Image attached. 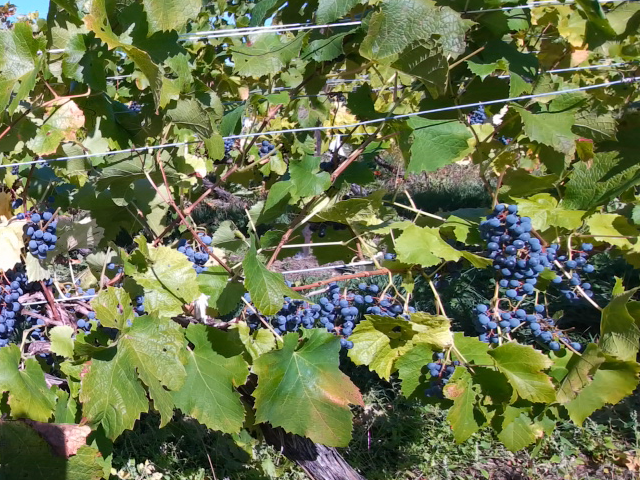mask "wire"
Masks as SVG:
<instances>
[{"mask_svg": "<svg viewBox=\"0 0 640 480\" xmlns=\"http://www.w3.org/2000/svg\"><path fill=\"white\" fill-rule=\"evenodd\" d=\"M638 83H640V77H624L623 79H619V80H614V81H610V82H601V83H598V84H592V85H588V86H581V87H576V88L567 89V90H563V91L541 92V93H536V94H532V95H525V96H520V97H515V98H504V99L485 100V101L472 102V103L455 104V105L443 106V107L435 108V109H423V110H420V111H411V112H407V113H403V114L382 116V117H376V118H371V119H368V120L355 121V122H337V123H330V124H316V125H313V126L296 127V128H291V129L236 132V133H231V134H225V135L222 136V139L223 140H228V139H233V138H238V137L294 134V133H298V132H313V131L318 130V129H332V128H339V127H357V126L370 125V124L378 123V122L405 119V118H410V117H413V116H422V115H425V114H437V113H443V112H446V111H452V110L464 109V108H475V107L480 108L482 106H487V105L517 103V102H522V101H527V100H534V99L543 98V97L565 96V95H570V94H574V93H578V92H584V91L600 89V88H603V87H612V86L622 85V84H638Z\"/></svg>", "mask_w": 640, "mask_h": 480, "instance_id": "obj_1", "label": "wire"}, {"mask_svg": "<svg viewBox=\"0 0 640 480\" xmlns=\"http://www.w3.org/2000/svg\"><path fill=\"white\" fill-rule=\"evenodd\" d=\"M202 144H203L202 140L181 141V142L165 143V144L154 145V146L133 147V148L123 149L119 151H111V152H91V153H84V154L64 155V156H58V157H52V158L21 160V161H15L10 163H2L0 164V169L12 168V167L23 166V165L54 163V162L74 160V159H86V158H94V157H113V156H121V155L135 153V152L156 151V150H162V149L174 148V147H183V146H200Z\"/></svg>", "mask_w": 640, "mask_h": 480, "instance_id": "obj_3", "label": "wire"}, {"mask_svg": "<svg viewBox=\"0 0 640 480\" xmlns=\"http://www.w3.org/2000/svg\"><path fill=\"white\" fill-rule=\"evenodd\" d=\"M85 298L84 294H80V295H76V296H72V297H68V298H60V297H56L55 301L58 303H71L74 301H78V300H82Z\"/></svg>", "mask_w": 640, "mask_h": 480, "instance_id": "obj_7", "label": "wire"}, {"mask_svg": "<svg viewBox=\"0 0 640 480\" xmlns=\"http://www.w3.org/2000/svg\"><path fill=\"white\" fill-rule=\"evenodd\" d=\"M569 3H570V0H540V1H531L529 4L502 5V6L489 7V8L463 9L461 11V14L465 15V14H475V13L499 12L504 10L545 8L546 5H568Z\"/></svg>", "mask_w": 640, "mask_h": 480, "instance_id": "obj_4", "label": "wire"}, {"mask_svg": "<svg viewBox=\"0 0 640 480\" xmlns=\"http://www.w3.org/2000/svg\"><path fill=\"white\" fill-rule=\"evenodd\" d=\"M624 62H610V63H592L586 66H573V67H560V68H548V73H562V72H575V71H588L594 68H612V67H624Z\"/></svg>", "mask_w": 640, "mask_h": 480, "instance_id": "obj_6", "label": "wire"}, {"mask_svg": "<svg viewBox=\"0 0 640 480\" xmlns=\"http://www.w3.org/2000/svg\"><path fill=\"white\" fill-rule=\"evenodd\" d=\"M362 24L361 20L353 22H339L325 25H312L311 21L307 22H287V23H271L252 26H240L224 29H212L195 32H185L180 34L179 41L202 40L213 38H224L234 36H261L271 34L291 33L295 31H311V30H327L342 27H356Z\"/></svg>", "mask_w": 640, "mask_h": 480, "instance_id": "obj_2", "label": "wire"}, {"mask_svg": "<svg viewBox=\"0 0 640 480\" xmlns=\"http://www.w3.org/2000/svg\"><path fill=\"white\" fill-rule=\"evenodd\" d=\"M375 264H376V261L374 259H368V260H361V261H350V262L336 264V265H321V266H313L309 268L280 270L279 274L294 275V274L311 273V272L323 271V270H338V269H344L352 266L375 265Z\"/></svg>", "mask_w": 640, "mask_h": 480, "instance_id": "obj_5", "label": "wire"}]
</instances>
